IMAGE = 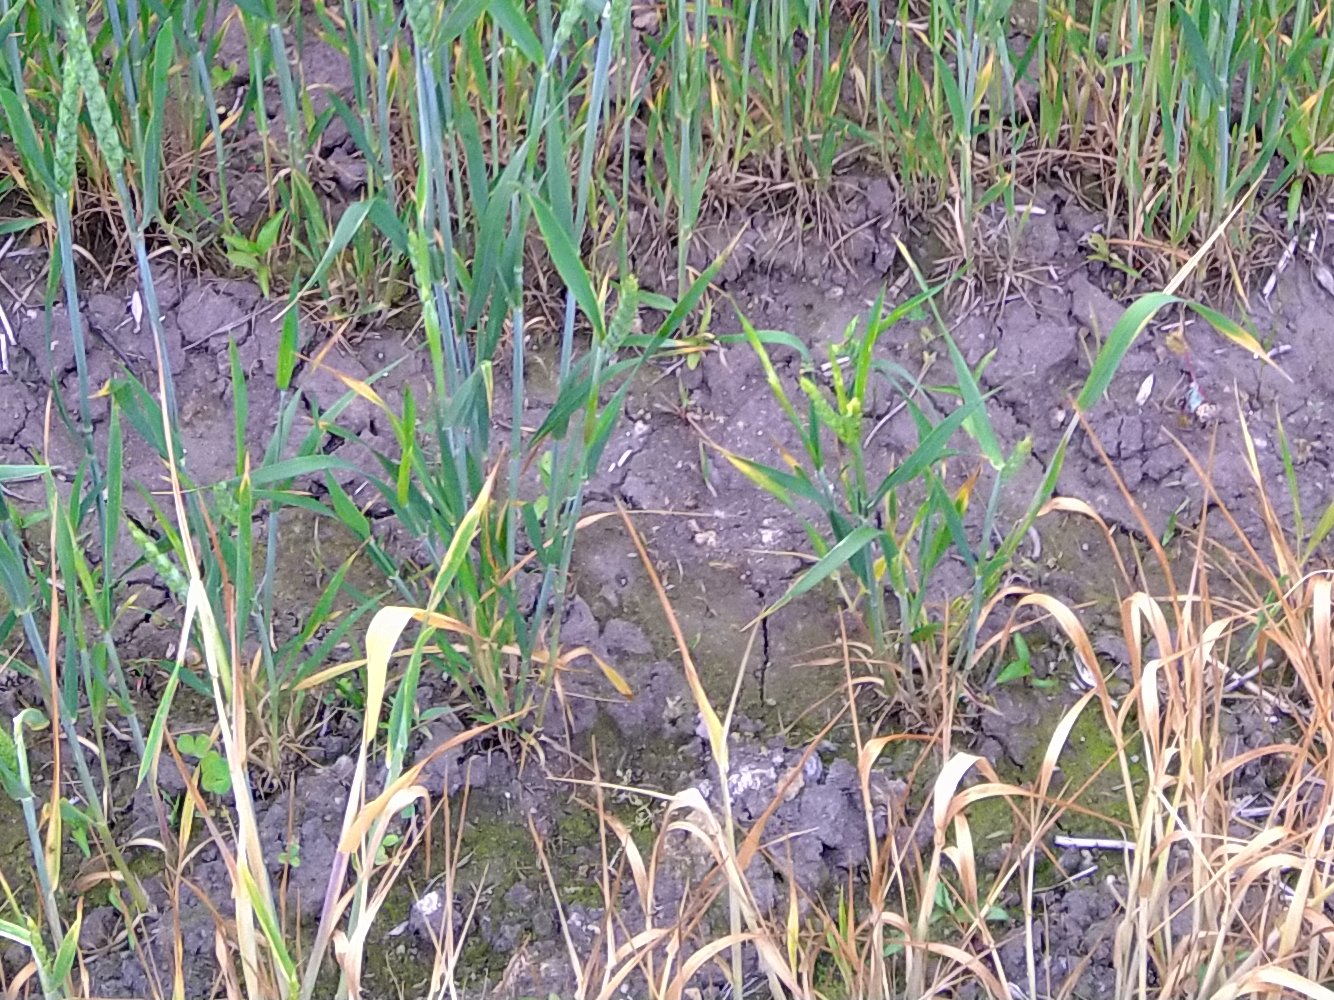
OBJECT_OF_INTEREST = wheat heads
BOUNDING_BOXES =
[55,59,80,190]
[392,0,433,45]
[801,379,845,440]
[605,277,640,356]
[68,20,123,171]
[124,518,188,604]
[611,0,640,53]
[555,0,619,43]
